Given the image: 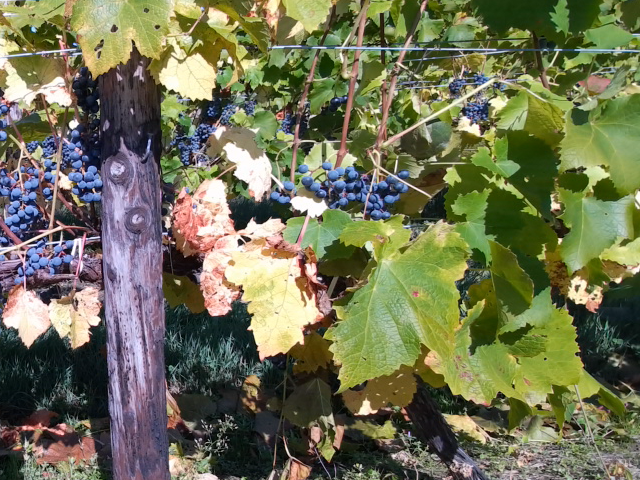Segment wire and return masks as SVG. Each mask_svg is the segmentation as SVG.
Instances as JSON below:
<instances>
[{
  "instance_id": "a73af890",
  "label": "wire",
  "mask_w": 640,
  "mask_h": 480,
  "mask_svg": "<svg viewBox=\"0 0 640 480\" xmlns=\"http://www.w3.org/2000/svg\"><path fill=\"white\" fill-rule=\"evenodd\" d=\"M82 51H83L82 47H75V48H61L56 50L35 51L32 53H10V54L0 55V60L13 59V58H35L37 56L58 55L63 53H77Z\"/></svg>"
},
{
  "instance_id": "d2f4af69",
  "label": "wire",
  "mask_w": 640,
  "mask_h": 480,
  "mask_svg": "<svg viewBox=\"0 0 640 480\" xmlns=\"http://www.w3.org/2000/svg\"><path fill=\"white\" fill-rule=\"evenodd\" d=\"M271 50L305 49L311 51H431V52H478V53H576L605 52L614 54H640V49H616L607 47H574V48H480V47H433V46H313L307 44L271 45Z\"/></svg>"
}]
</instances>
